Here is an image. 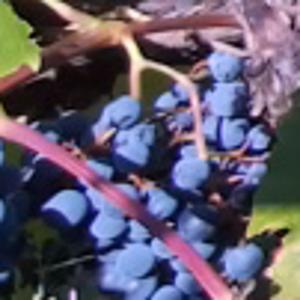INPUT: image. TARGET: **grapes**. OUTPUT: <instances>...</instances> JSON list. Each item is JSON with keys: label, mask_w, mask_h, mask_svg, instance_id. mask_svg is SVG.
<instances>
[{"label": "grapes", "mask_w": 300, "mask_h": 300, "mask_svg": "<svg viewBox=\"0 0 300 300\" xmlns=\"http://www.w3.org/2000/svg\"><path fill=\"white\" fill-rule=\"evenodd\" d=\"M206 66L214 80L203 94L202 114L208 159L199 157L192 144L179 146L166 173V185L142 192L124 182H114L125 195L137 200L146 215L176 232L181 242L197 250L204 259L235 279L259 276L269 261L262 243L240 244L219 250L215 241L220 212L207 202L209 184L220 176L233 175L238 181L221 191L226 209L241 219L253 212V200L269 173L266 161L273 138L265 122L245 115L250 107V90L241 77L243 63L231 53L211 52Z\"/></svg>", "instance_id": "01657485"}, {"label": "grapes", "mask_w": 300, "mask_h": 300, "mask_svg": "<svg viewBox=\"0 0 300 300\" xmlns=\"http://www.w3.org/2000/svg\"><path fill=\"white\" fill-rule=\"evenodd\" d=\"M7 145L0 138V247L13 239L31 214L69 236L85 223L97 252L96 288L105 296L122 293L123 300H207L189 270L161 240L148 237L133 219L93 188L73 183L62 187L33 209L30 191L50 186L63 176L62 166L24 152L18 169L6 161ZM159 261H169L170 284L153 274Z\"/></svg>", "instance_id": "b958b902"}, {"label": "grapes", "mask_w": 300, "mask_h": 300, "mask_svg": "<svg viewBox=\"0 0 300 300\" xmlns=\"http://www.w3.org/2000/svg\"><path fill=\"white\" fill-rule=\"evenodd\" d=\"M143 106L139 97L125 95L103 104L94 118L65 114L59 121L40 120L32 127L43 132L74 160L113 182L117 172L137 173L155 160L160 142L157 126L140 122Z\"/></svg>", "instance_id": "0513c4c2"}, {"label": "grapes", "mask_w": 300, "mask_h": 300, "mask_svg": "<svg viewBox=\"0 0 300 300\" xmlns=\"http://www.w3.org/2000/svg\"><path fill=\"white\" fill-rule=\"evenodd\" d=\"M190 107V102L182 86L174 82L170 91L158 95L151 104V110L155 114H168L169 120L184 134L194 131L192 114L184 110Z\"/></svg>", "instance_id": "84f90ec7"}]
</instances>
